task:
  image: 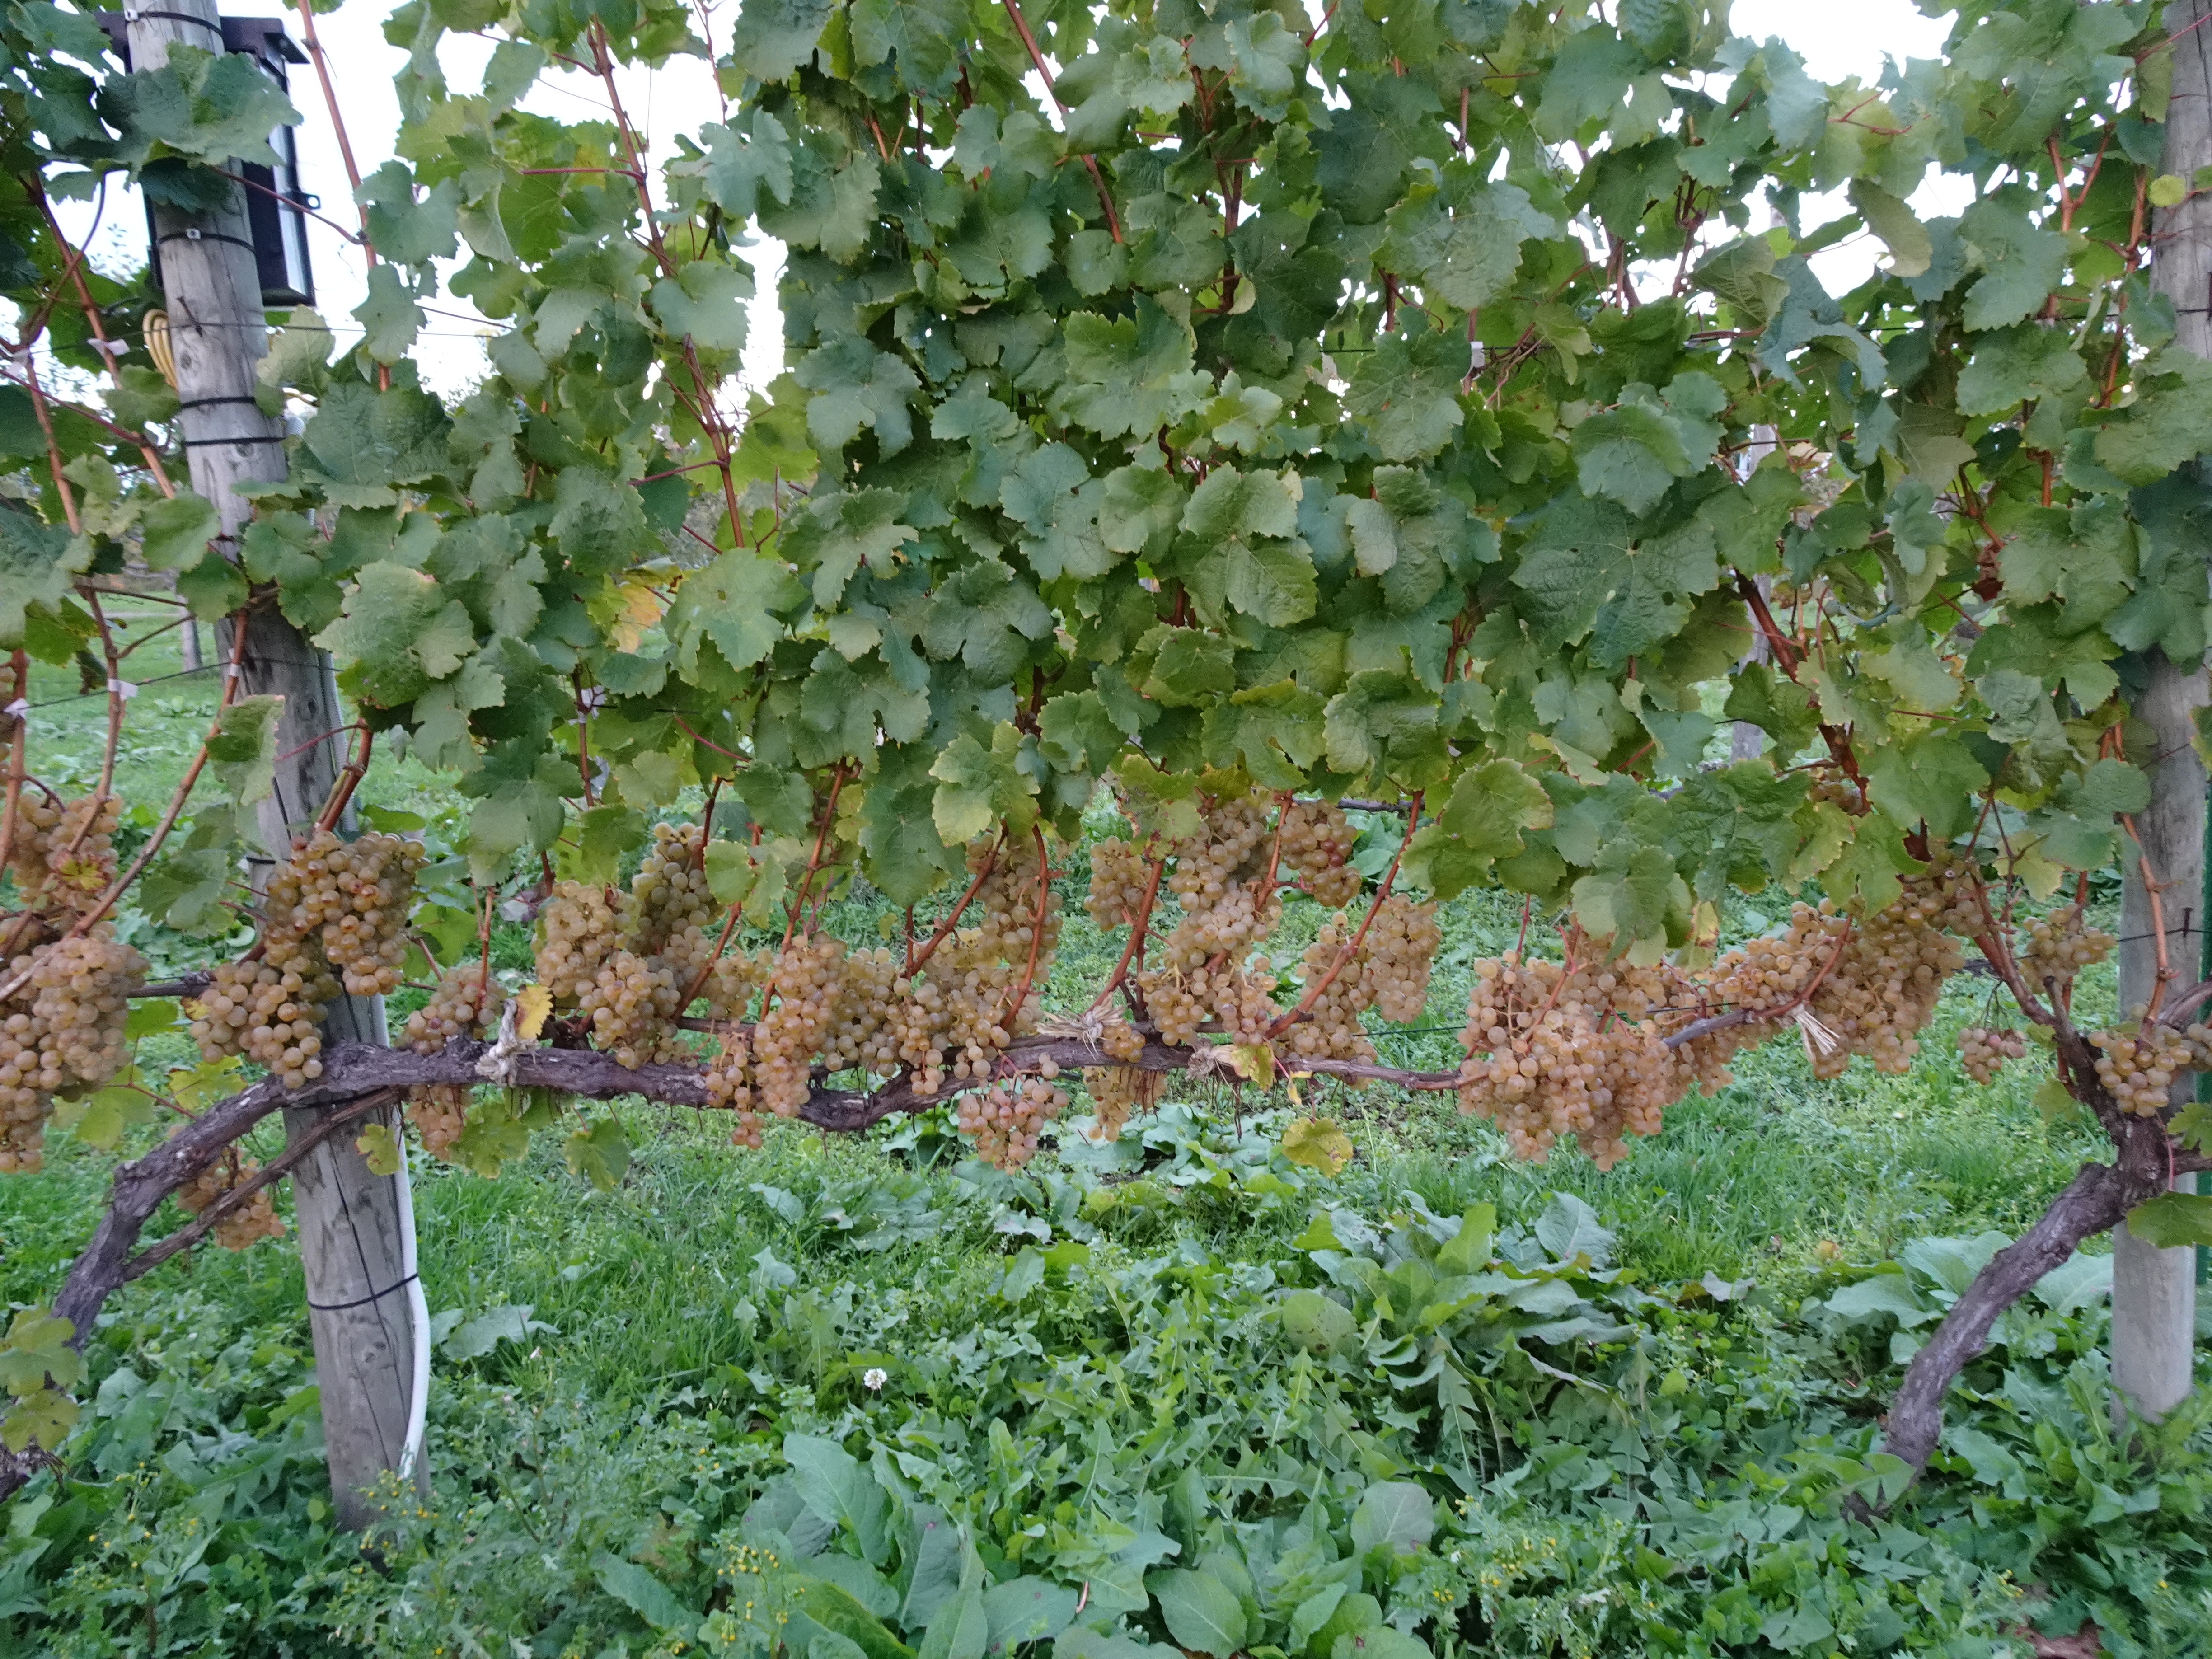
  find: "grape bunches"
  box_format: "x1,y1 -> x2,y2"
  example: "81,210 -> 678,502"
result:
1614,949 -> 1712,1011
0,1086 -> 56,1176
256,1001 -> 329,1094
1709,932 -> 1822,1014
1079,830 -> 1159,935
1131,1062 -> 1170,1116
771,929 -> 854,1017
752,1000 -> 835,1121
187,960 -> 277,1064
1567,976 -> 1654,1023
1292,910 -> 1380,1090
1851,901 -> 1975,981
1782,900 -> 1864,959
883,979 -> 951,1099
1361,891 -> 1444,1024
1955,1018 -> 2033,1089
0,919 -> 152,1082
4,792 -> 60,904
944,970 -> 1012,1088
822,1015 -> 902,1089
257,909 -> 339,1003
1615,1018 -> 1673,1135
956,1052 -> 1068,1179
1457,947 -> 1558,1052
1274,800 -> 1361,911
406,1081 -> 475,1166
259,826 -> 340,964
1820,959 -> 1926,1082
1211,955 -> 1283,1053
1906,882 -> 1996,937
399,953 -> 511,1051
1570,1114 -> 1637,1176
620,821 -> 719,957
575,953 -> 687,1077
1539,1012 -> 1615,1144
903,919 -> 986,990
1441,1053 -> 1558,1169
1668,1019 -> 1760,1099
1728,1012 -> 1803,1054
2016,902 -> 2116,995
2088,1002 -> 2212,1120
1807,766 -> 1867,812
176,1142 -> 261,1218
49,790 -> 126,932
1163,887 -> 1289,973
0,665 -> 20,777
1082,1070 -> 1135,1146
1165,786 -> 1269,914
1099,1014 -> 1146,1068
966,848 -> 1065,1041
698,1021 -> 768,1155
832,942 -> 902,1028
326,829 -> 434,923
216,1188 -> 293,1252
531,878 -> 630,1000
698,939 -> 764,1028
324,913 -> 413,1000
1135,964 -> 1210,1049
